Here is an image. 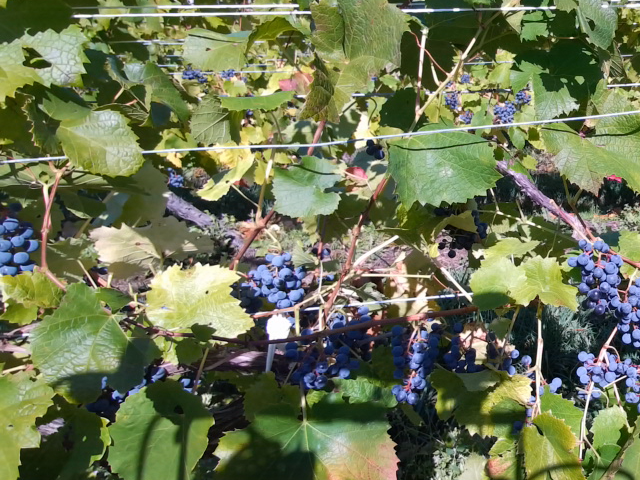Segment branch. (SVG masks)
Here are the masks:
<instances>
[{
    "instance_id": "branch-6",
    "label": "branch",
    "mask_w": 640,
    "mask_h": 480,
    "mask_svg": "<svg viewBox=\"0 0 640 480\" xmlns=\"http://www.w3.org/2000/svg\"><path fill=\"white\" fill-rule=\"evenodd\" d=\"M274 214H275V211L273 209H270L265 214V216L256 224V226L253 228V231L250 233V235L243 241L242 245L239 247V249L235 254L234 260L228 266V270L230 272H233L237 268V266L242 260L243 254L246 252V250L250 246V243L254 241V239L260 233L262 228L268 223V221L274 216Z\"/></svg>"
},
{
    "instance_id": "branch-8",
    "label": "branch",
    "mask_w": 640,
    "mask_h": 480,
    "mask_svg": "<svg viewBox=\"0 0 640 480\" xmlns=\"http://www.w3.org/2000/svg\"><path fill=\"white\" fill-rule=\"evenodd\" d=\"M608 253L612 254L613 256H615L618 260H620L626 266H629V267H632V268L640 270V261H633V260H629L628 261L626 258H624L623 255H621L619 252H617L614 249H609Z\"/></svg>"
},
{
    "instance_id": "branch-4",
    "label": "branch",
    "mask_w": 640,
    "mask_h": 480,
    "mask_svg": "<svg viewBox=\"0 0 640 480\" xmlns=\"http://www.w3.org/2000/svg\"><path fill=\"white\" fill-rule=\"evenodd\" d=\"M494 163L496 164V170L498 172L503 171L507 175L517 179L528 195L532 196L536 201L541 202L544 206L549 207L555 215L562 219L574 239L585 240L587 238V235L584 233V226L556 205L552 198L542 192L525 174L505 165L500 158H496Z\"/></svg>"
},
{
    "instance_id": "branch-7",
    "label": "branch",
    "mask_w": 640,
    "mask_h": 480,
    "mask_svg": "<svg viewBox=\"0 0 640 480\" xmlns=\"http://www.w3.org/2000/svg\"><path fill=\"white\" fill-rule=\"evenodd\" d=\"M123 322L129 326L137 327L144 332L156 334L162 338H191L193 336V333L191 331H165L158 327L146 325L140 320L131 319L129 316H125L123 318Z\"/></svg>"
},
{
    "instance_id": "branch-1",
    "label": "branch",
    "mask_w": 640,
    "mask_h": 480,
    "mask_svg": "<svg viewBox=\"0 0 640 480\" xmlns=\"http://www.w3.org/2000/svg\"><path fill=\"white\" fill-rule=\"evenodd\" d=\"M481 309L479 304L473 306H462L454 309H445L441 311L432 312H417L408 315H395L374 317L371 320H362L354 324H345L342 326L331 327L314 333L299 334L291 337H272L264 340L245 339L240 337H228L222 333L213 332L211 337L215 340H220L226 344H238L251 347H266L274 344H293L301 341L317 340L333 334L344 333L347 331H356L364 327H373L377 324L397 323V322H410L412 320L419 319H434L443 318L447 316H456L464 313H475Z\"/></svg>"
},
{
    "instance_id": "branch-3",
    "label": "branch",
    "mask_w": 640,
    "mask_h": 480,
    "mask_svg": "<svg viewBox=\"0 0 640 480\" xmlns=\"http://www.w3.org/2000/svg\"><path fill=\"white\" fill-rule=\"evenodd\" d=\"M73 166V162L68 160L56 173V176L53 180V183L50 187L48 183L43 185V196L41 200V208L44 215L43 225L41 228L40 234V244L38 249V264L42 272L51 279V281L56 285L58 289L61 291H66L68 286L63 284L59 278L47 267L45 262V251L47 246V236L48 230L50 227L51 217H52V206L54 203V199L56 196L57 189L60 185V182L63 178V175Z\"/></svg>"
},
{
    "instance_id": "branch-2",
    "label": "branch",
    "mask_w": 640,
    "mask_h": 480,
    "mask_svg": "<svg viewBox=\"0 0 640 480\" xmlns=\"http://www.w3.org/2000/svg\"><path fill=\"white\" fill-rule=\"evenodd\" d=\"M482 31L483 28L481 26H478L475 29L474 34L469 38V40L465 42L461 52L458 55L457 60L454 63V66L442 79L439 87L424 102H422L423 97L425 96L426 40L428 28L426 26H423L421 28L419 38L418 94L416 95V99L413 103L414 118L408 126L409 131L415 130L416 126L419 124V121L423 117L426 108L429 107L445 91L449 82L461 68L462 63L467 58L476 40L481 36Z\"/></svg>"
},
{
    "instance_id": "branch-5",
    "label": "branch",
    "mask_w": 640,
    "mask_h": 480,
    "mask_svg": "<svg viewBox=\"0 0 640 480\" xmlns=\"http://www.w3.org/2000/svg\"><path fill=\"white\" fill-rule=\"evenodd\" d=\"M389 179H390V175L388 173H385L382 176V178L377 182V186L371 191V193L368 196L367 200L365 201V203L363 204L362 208L360 209V213L358 215V218H357L356 224H355V231L353 232L351 241H350L349 246H348V250H347L346 255H345V261H344L343 269L341 270V272L339 273V276L337 277V280L335 281V283L331 287L330 293H329L328 298L326 300V309H325V312L323 314V317L325 319H328L331 316L332 311H333V302H334L335 297L337 295L338 289L342 286L346 276L348 275V273L350 271L351 263H352V257H353V254L355 252V248H356V245L358 243L360 234L362 233L363 222H364V220L366 218L367 211L369 210L370 206L374 202V200L377 197L378 193L381 192L384 189V185L386 184V182Z\"/></svg>"
},
{
    "instance_id": "branch-9",
    "label": "branch",
    "mask_w": 640,
    "mask_h": 480,
    "mask_svg": "<svg viewBox=\"0 0 640 480\" xmlns=\"http://www.w3.org/2000/svg\"><path fill=\"white\" fill-rule=\"evenodd\" d=\"M325 125H326V121H325L324 119H321V120L318 122V124H317V126H316V128H315V130H314L313 137H312V140H313L314 142H317V141L320 139L321 132H322V130H323V128H324V126H325Z\"/></svg>"
}]
</instances>
